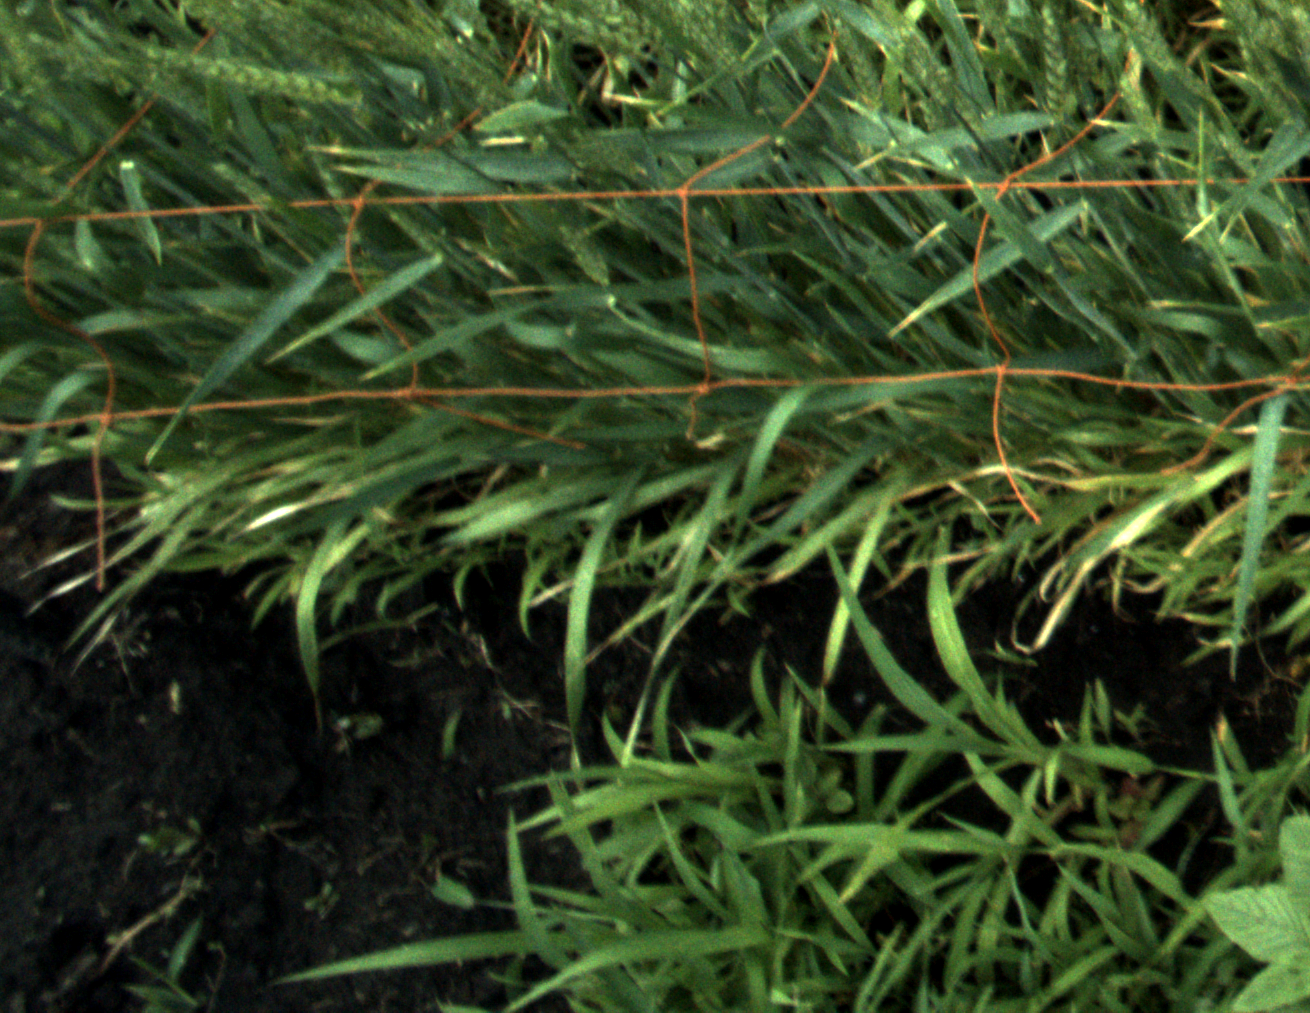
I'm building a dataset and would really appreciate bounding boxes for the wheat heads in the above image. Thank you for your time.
[1057,17,1104,79]
[206,0,254,39]
[473,88,510,109]
[0,0,50,102]
[1214,132,1258,176]
[528,0,674,50]
[829,16,878,100]
[1214,0,1282,79]
[23,31,114,84]
[430,0,490,28]
[892,21,959,107]
[296,0,371,28]
[1255,79,1296,127]
[592,138,645,182]
[1236,30,1256,80]
[432,38,482,90]
[1223,0,1293,58]
[316,166,366,246]
[682,0,729,37]
[387,209,442,256]
[140,44,352,106]
[288,12,344,40]
[664,0,749,86]
[1289,3,1310,83]
[971,0,1025,71]
[1118,79,1162,139]
[493,0,656,65]
[1038,0,1070,119]
[562,226,611,284]
[1173,56,1212,101]
[1120,0,1180,75]
[212,162,282,214]
[229,0,307,53]
[150,0,214,32]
